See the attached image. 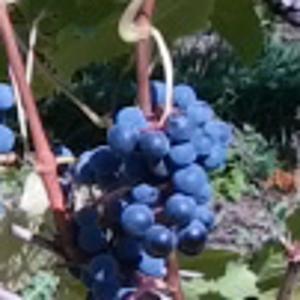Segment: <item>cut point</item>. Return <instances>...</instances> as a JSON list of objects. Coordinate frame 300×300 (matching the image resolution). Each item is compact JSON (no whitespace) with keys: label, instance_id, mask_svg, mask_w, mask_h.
<instances>
[{"label":"cut point","instance_id":"6a23745f","mask_svg":"<svg viewBox=\"0 0 300 300\" xmlns=\"http://www.w3.org/2000/svg\"><path fill=\"white\" fill-rule=\"evenodd\" d=\"M148 29L159 46V53L163 63V70L166 75L165 102L168 105H171L173 103L172 93L174 80L170 52L168 46L165 44L163 38L161 37L159 31L155 28V26L153 24H150L148 26Z\"/></svg>","mask_w":300,"mask_h":300}]
</instances>
